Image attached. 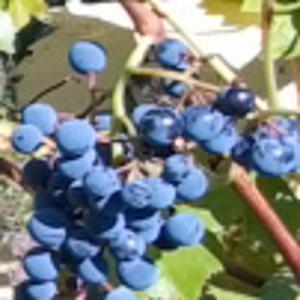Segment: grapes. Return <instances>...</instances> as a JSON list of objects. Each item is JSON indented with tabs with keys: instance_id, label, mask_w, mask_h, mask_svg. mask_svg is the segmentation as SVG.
<instances>
[{
	"instance_id": "grapes-1",
	"label": "grapes",
	"mask_w": 300,
	"mask_h": 300,
	"mask_svg": "<svg viewBox=\"0 0 300 300\" xmlns=\"http://www.w3.org/2000/svg\"><path fill=\"white\" fill-rule=\"evenodd\" d=\"M258 109L255 89L235 82L217 89L213 102L181 111L165 103L135 106L129 116L98 110L93 119L60 122L49 103L20 111L12 146L27 161L22 179L39 188L29 237L39 245L27 250L19 283L23 300H55L60 265L74 276L70 289L97 286L111 277L103 247L113 259L124 288L105 300H135L157 281L159 267L148 246L177 249L199 244L206 235L202 219L181 213L164 219L175 203L199 201L208 177L194 170L197 144L212 155H226L237 167L261 177L300 171V119L277 118L245 137L237 123Z\"/></svg>"
},
{
	"instance_id": "grapes-2",
	"label": "grapes",
	"mask_w": 300,
	"mask_h": 300,
	"mask_svg": "<svg viewBox=\"0 0 300 300\" xmlns=\"http://www.w3.org/2000/svg\"><path fill=\"white\" fill-rule=\"evenodd\" d=\"M70 65L80 74H100L107 67V51L92 39L79 40L68 48Z\"/></svg>"
},
{
	"instance_id": "grapes-3",
	"label": "grapes",
	"mask_w": 300,
	"mask_h": 300,
	"mask_svg": "<svg viewBox=\"0 0 300 300\" xmlns=\"http://www.w3.org/2000/svg\"><path fill=\"white\" fill-rule=\"evenodd\" d=\"M186 47L178 39H166L157 44L153 50L155 63L163 70L174 74H184L189 69L185 60Z\"/></svg>"
},
{
	"instance_id": "grapes-4",
	"label": "grapes",
	"mask_w": 300,
	"mask_h": 300,
	"mask_svg": "<svg viewBox=\"0 0 300 300\" xmlns=\"http://www.w3.org/2000/svg\"><path fill=\"white\" fill-rule=\"evenodd\" d=\"M159 88L165 92L166 95L173 98H181L185 95L187 90L186 85L179 80H171L169 78H163L159 82Z\"/></svg>"
}]
</instances>
